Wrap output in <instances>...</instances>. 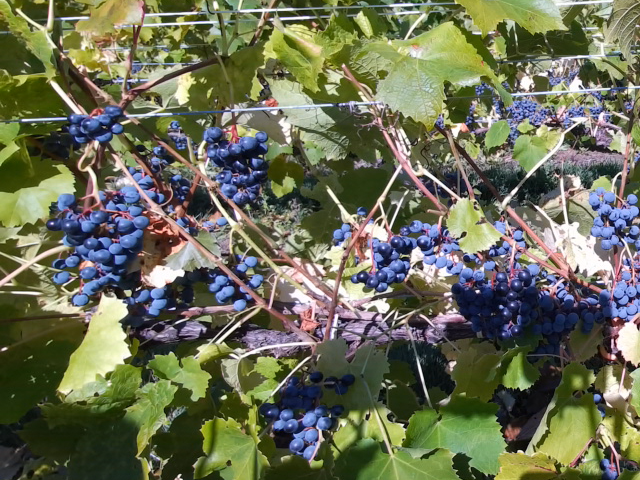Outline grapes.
Instances as JSON below:
<instances>
[{"mask_svg": "<svg viewBox=\"0 0 640 480\" xmlns=\"http://www.w3.org/2000/svg\"><path fill=\"white\" fill-rule=\"evenodd\" d=\"M399 236L393 235L389 243H381V239L371 237L367 240V246L372 247V262L375 269L372 273L358 272L350 276L353 284L365 283L366 288H376L378 293L388 289V285L402 284L409 271L410 259L401 258L409 255L414 248L424 254L423 262L426 265H434L437 270L446 269V273L459 276L458 283L451 287V293L455 295L459 304V314L471 323L474 333H481L483 337L494 339L496 336L502 342H508L512 336L520 337L524 333L523 316L521 309L522 292L532 289L543 278L554 286L557 278L549 274L547 270H540L536 263L527 265L523 269L518 261L513 263L514 279L508 281L504 270L494 273L496 281L487 280V273L496 268L494 259H482L476 254H464L463 261L482 264V270L464 268L462 262L454 263L450 258L439 257L434 253L435 243L443 238L441 251L451 254L459 251L458 241L450 235L449 229L444 227L441 234L438 233V225L422 223L420 220H411L409 225L399 228Z\"/></svg>", "mask_w": 640, "mask_h": 480, "instance_id": "01657485", "label": "grapes"}, {"mask_svg": "<svg viewBox=\"0 0 640 480\" xmlns=\"http://www.w3.org/2000/svg\"><path fill=\"white\" fill-rule=\"evenodd\" d=\"M97 199L106 201L107 211L127 212L131 218L112 216L105 211H89L86 216L71 209L76 204L74 195L60 194L56 200V208L64 218H53L46 222L49 231H63L61 243L65 248H74L77 253L67 259H56L52 262L54 269H70L79 266L83 260L96 266H84L79 271L81 279L88 280L83 284L81 293L71 296L73 306L86 305L89 297L108 282L118 283L128 272L124 265L127 260H135L137 252L143 249L145 229L149 219L142 215V205H126L136 203L140 196L133 187H122L119 195L112 199L104 190L97 192ZM107 224L109 233H116L119 239L112 237H89L97 229V225Z\"/></svg>", "mask_w": 640, "mask_h": 480, "instance_id": "b958b902", "label": "grapes"}, {"mask_svg": "<svg viewBox=\"0 0 640 480\" xmlns=\"http://www.w3.org/2000/svg\"><path fill=\"white\" fill-rule=\"evenodd\" d=\"M223 135L219 126H209L203 131L201 138L209 145L206 154L214 167H225L221 173L215 175V180L221 183L219 189L236 204H246L248 200H255L261 187V182L268 181L270 162L260 155L269 151L266 142L269 135L264 130H258L254 135H245L232 143L228 139L216 142Z\"/></svg>", "mask_w": 640, "mask_h": 480, "instance_id": "0513c4c2", "label": "grapes"}, {"mask_svg": "<svg viewBox=\"0 0 640 480\" xmlns=\"http://www.w3.org/2000/svg\"><path fill=\"white\" fill-rule=\"evenodd\" d=\"M297 383L298 378L291 376L286 381V386L278 389L281 402L275 406L272 403L264 404L259 409V414L267 419L278 418L273 423V430L294 437L289 441V453L292 456L312 460L317 451L318 430L326 432L331 427L332 420L323 416L327 412L325 405L313 408V403L322 398V389L316 385L297 387ZM294 408L309 411L298 422L293 417Z\"/></svg>", "mask_w": 640, "mask_h": 480, "instance_id": "84f90ec7", "label": "grapes"}, {"mask_svg": "<svg viewBox=\"0 0 640 480\" xmlns=\"http://www.w3.org/2000/svg\"><path fill=\"white\" fill-rule=\"evenodd\" d=\"M615 199L616 195L612 191H605L603 187H598L596 192L589 193L591 209L598 214L593 220L594 226L590 234L593 237L604 238L601 241V248L605 251H610L613 245L624 247L625 243L619 239L620 237L627 243H633L637 253L640 254V227L633 224L628 234L621 231L627 228L629 221L639 215V208L635 206L639 203L638 197L635 193L627 195L626 203L629 208L612 206L610 203Z\"/></svg>", "mask_w": 640, "mask_h": 480, "instance_id": "f8a65327", "label": "grapes"}, {"mask_svg": "<svg viewBox=\"0 0 640 480\" xmlns=\"http://www.w3.org/2000/svg\"><path fill=\"white\" fill-rule=\"evenodd\" d=\"M634 285L627 283L631 280V273L621 271V279L613 291L603 288L598 295L590 294L579 302L582 311H587L590 306L599 304L602 307V316L632 321L640 313V272L635 274Z\"/></svg>", "mask_w": 640, "mask_h": 480, "instance_id": "5460f4e3", "label": "grapes"}, {"mask_svg": "<svg viewBox=\"0 0 640 480\" xmlns=\"http://www.w3.org/2000/svg\"><path fill=\"white\" fill-rule=\"evenodd\" d=\"M104 113L105 115L97 114L94 118L73 112L69 115L70 123L64 124L62 131L68 133L75 143H88L90 140L107 143L113 139V134L120 135L124 132V126L114 121L123 115V109L117 105H107Z\"/></svg>", "mask_w": 640, "mask_h": 480, "instance_id": "83cd7487", "label": "grapes"}, {"mask_svg": "<svg viewBox=\"0 0 640 480\" xmlns=\"http://www.w3.org/2000/svg\"><path fill=\"white\" fill-rule=\"evenodd\" d=\"M165 291L163 289H141L136 295L128 296L126 303L128 305L143 304L148 299L151 300V305L146 307V312L149 316H158L161 310L167 305V299L164 297Z\"/></svg>", "mask_w": 640, "mask_h": 480, "instance_id": "e5b3c951", "label": "grapes"}, {"mask_svg": "<svg viewBox=\"0 0 640 480\" xmlns=\"http://www.w3.org/2000/svg\"><path fill=\"white\" fill-rule=\"evenodd\" d=\"M207 276L213 279L209 285V292L214 294L215 301L219 305L226 304L228 298L235 294V288L231 286V283H234V279L229 275H221L219 272H213L212 270L207 272Z\"/></svg>", "mask_w": 640, "mask_h": 480, "instance_id": "2adb6a1f", "label": "grapes"}, {"mask_svg": "<svg viewBox=\"0 0 640 480\" xmlns=\"http://www.w3.org/2000/svg\"><path fill=\"white\" fill-rule=\"evenodd\" d=\"M128 169H129L131 175L138 181V183L144 189L146 194L156 204H162L165 201V194L164 193H155L154 190H149L151 187L154 186V179L149 175H146L145 177H143V174H144V170L143 169H140V170H137V171H136V169L134 167H129Z\"/></svg>", "mask_w": 640, "mask_h": 480, "instance_id": "ef6de9ee", "label": "grapes"}, {"mask_svg": "<svg viewBox=\"0 0 640 480\" xmlns=\"http://www.w3.org/2000/svg\"><path fill=\"white\" fill-rule=\"evenodd\" d=\"M353 383L354 376L352 374L343 375L341 379L334 376H328L324 379L323 387L328 390H333L335 388V393L337 395H344Z\"/></svg>", "mask_w": 640, "mask_h": 480, "instance_id": "1ff8f66d", "label": "grapes"}, {"mask_svg": "<svg viewBox=\"0 0 640 480\" xmlns=\"http://www.w3.org/2000/svg\"><path fill=\"white\" fill-rule=\"evenodd\" d=\"M152 153L154 155L151 158V172H158L161 169V166H166L173 162V157L166 155L167 150L163 149L161 145L154 146Z\"/></svg>", "mask_w": 640, "mask_h": 480, "instance_id": "54f908b8", "label": "grapes"}, {"mask_svg": "<svg viewBox=\"0 0 640 480\" xmlns=\"http://www.w3.org/2000/svg\"><path fill=\"white\" fill-rule=\"evenodd\" d=\"M170 182L173 186H179L174 191L173 197L177 199L178 203H183L187 193L190 191L189 182L182 175H172Z\"/></svg>", "mask_w": 640, "mask_h": 480, "instance_id": "91a60905", "label": "grapes"}, {"mask_svg": "<svg viewBox=\"0 0 640 480\" xmlns=\"http://www.w3.org/2000/svg\"><path fill=\"white\" fill-rule=\"evenodd\" d=\"M569 287L570 284L568 282H563L558 285V288L555 291V297L563 299V306L566 310H572L578 306V301L575 297L573 295H568V290L565 289Z\"/></svg>", "mask_w": 640, "mask_h": 480, "instance_id": "dcf779d0", "label": "grapes"}, {"mask_svg": "<svg viewBox=\"0 0 640 480\" xmlns=\"http://www.w3.org/2000/svg\"><path fill=\"white\" fill-rule=\"evenodd\" d=\"M234 261L236 262V266L234 269L240 274L243 275L245 272L250 269L257 268L259 266V260L253 256H247L246 258L241 255H236L234 257Z\"/></svg>", "mask_w": 640, "mask_h": 480, "instance_id": "802abce8", "label": "grapes"}, {"mask_svg": "<svg viewBox=\"0 0 640 480\" xmlns=\"http://www.w3.org/2000/svg\"><path fill=\"white\" fill-rule=\"evenodd\" d=\"M351 237V227L348 223H342L339 226V229L333 231L332 239L333 244L336 246H341L345 239H349Z\"/></svg>", "mask_w": 640, "mask_h": 480, "instance_id": "012428b0", "label": "grapes"}, {"mask_svg": "<svg viewBox=\"0 0 640 480\" xmlns=\"http://www.w3.org/2000/svg\"><path fill=\"white\" fill-rule=\"evenodd\" d=\"M511 252H512L511 245L503 241L501 243V247H498L496 244L491 245L487 250V255L489 257H499L503 255H508Z\"/></svg>", "mask_w": 640, "mask_h": 480, "instance_id": "9fbda902", "label": "grapes"}, {"mask_svg": "<svg viewBox=\"0 0 640 480\" xmlns=\"http://www.w3.org/2000/svg\"><path fill=\"white\" fill-rule=\"evenodd\" d=\"M238 292L244 293L245 298H237L232 305V309L234 311H242L247 307V302L252 301L253 298L250 293H248L245 289H243L240 285L238 286Z\"/></svg>", "mask_w": 640, "mask_h": 480, "instance_id": "34c12dc5", "label": "grapes"}, {"mask_svg": "<svg viewBox=\"0 0 640 480\" xmlns=\"http://www.w3.org/2000/svg\"><path fill=\"white\" fill-rule=\"evenodd\" d=\"M510 238L515 240L516 242L520 243L525 248L528 247V244L524 240H522L523 239V230L522 229H518V228L513 229L511 231Z\"/></svg>", "mask_w": 640, "mask_h": 480, "instance_id": "4a4d1313", "label": "grapes"}, {"mask_svg": "<svg viewBox=\"0 0 640 480\" xmlns=\"http://www.w3.org/2000/svg\"><path fill=\"white\" fill-rule=\"evenodd\" d=\"M493 227L497 229L498 232H501L502 234L506 233V223L504 221L501 220H496L493 224Z\"/></svg>", "mask_w": 640, "mask_h": 480, "instance_id": "23402543", "label": "grapes"}]
</instances>
